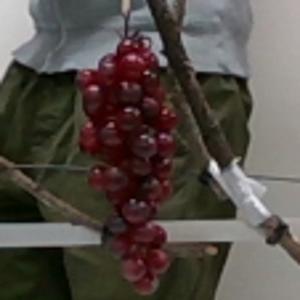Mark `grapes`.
<instances>
[{"instance_id": "grapes-1", "label": "grapes", "mask_w": 300, "mask_h": 300, "mask_svg": "<svg viewBox=\"0 0 300 300\" xmlns=\"http://www.w3.org/2000/svg\"><path fill=\"white\" fill-rule=\"evenodd\" d=\"M159 64L156 50L126 37L117 44L116 54L101 57L99 71L86 68L76 78L89 120L80 131L81 152L107 161L90 169L87 182L120 215L104 224L105 253L112 262L121 263V275L142 295L156 291L158 275L171 265L170 255L162 249L167 231L152 219L158 203L173 193L170 157L177 140L171 132L179 116L167 106L170 92L158 82Z\"/></svg>"}]
</instances>
